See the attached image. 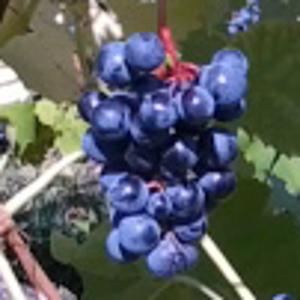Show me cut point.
<instances>
[{
	"mask_svg": "<svg viewBox=\"0 0 300 300\" xmlns=\"http://www.w3.org/2000/svg\"><path fill=\"white\" fill-rule=\"evenodd\" d=\"M157 27L163 32L166 47L169 50L174 48L172 42L171 27L167 25V0H157Z\"/></svg>",
	"mask_w": 300,
	"mask_h": 300,
	"instance_id": "1",
	"label": "cut point"
}]
</instances>
